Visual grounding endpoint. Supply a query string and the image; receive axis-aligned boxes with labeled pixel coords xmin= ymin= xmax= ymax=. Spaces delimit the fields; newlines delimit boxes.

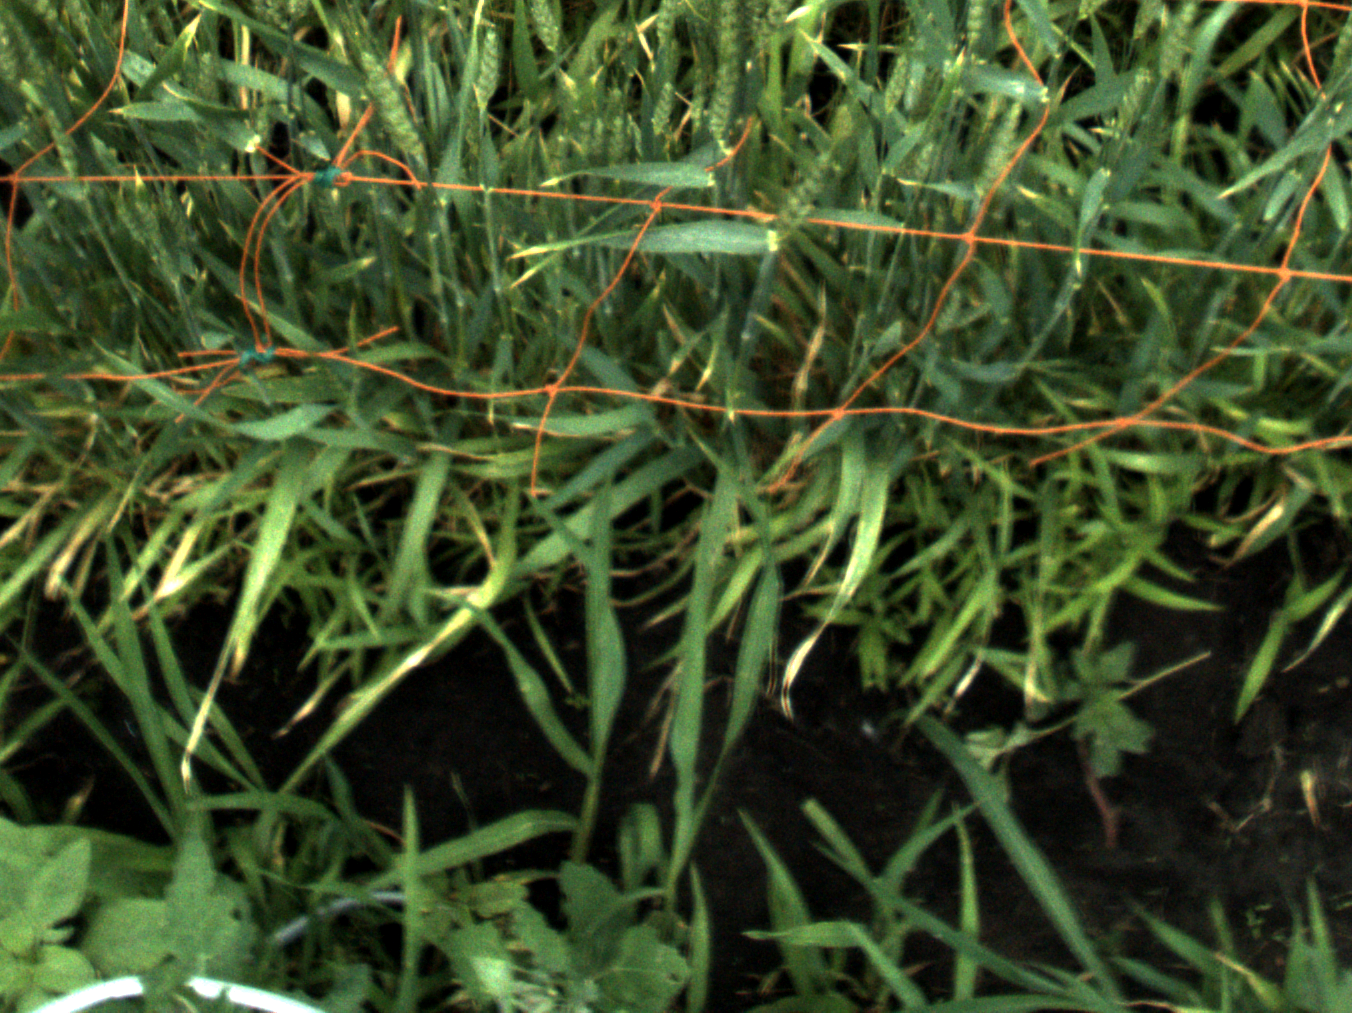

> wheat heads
xmin=775 ymin=147 xmax=833 ymax=236
xmin=752 ymin=0 xmax=814 ymax=49
xmin=48 ymin=109 xmax=81 ymax=178
xmin=708 ymin=0 xmax=741 ymax=135
xmin=553 ymin=68 xmax=581 ymax=129
xmin=925 ymin=204 xmax=945 ymax=253
xmin=312 ymin=182 xmax=343 ymax=231
xmin=463 ymin=96 xmax=482 ymax=146
xmin=193 ymin=49 xmax=214 ymax=101
xmin=138 ymin=12 xmax=157 ymax=55
xmin=3 ymin=7 xmax=47 ymax=74
xmin=686 ymin=68 xmax=705 ymax=137
xmin=684 ymin=0 xmax=715 ymax=44
xmin=881 ymin=51 xmax=904 ymax=117
xmin=941 ymin=56 xmax=957 ymax=85
xmin=650 ymin=82 xmax=676 ymax=138
xmin=0 ymin=3 xmax=16 ymax=83
xmin=1130 ymin=0 xmax=1163 ymax=41
xmin=1329 ymin=0 xmax=1352 ymax=60
xmin=976 ymin=97 xmax=1022 ymax=192
xmin=252 ymin=97 xmax=270 ymax=142
xmin=255 ymin=0 xmax=291 ymax=30
xmin=607 ymin=114 xmax=629 ymax=164
xmin=528 ymin=0 xmax=561 ymax=53
xmin=931 ymin=291 xmax=961 ymax=335
xmin=474 ymin=26 xmax=498 ymax=102
xmin=966 ymin=0 xmax=1007 ymax=48
xmin=1112 ymin=66 xmax=1151 ymax=131
xmin=915 ymin=138 xmax=936 ymax=180
xmin=152 ymin=4 xmax=175 ymax=43
xmin=48 ymin=0 xmax=87 ymax=27
xmin=739 ymin=0 xmax=769 ymax=40
xmin=655 ymin=0 xmax=680 ymax=38
xmin=1156 ymin=2 xmax=1198 ymax=75
xmin=832 ymin=100 xmax=855 ymax=147
xmin=285 ymin=0 xmax=315 ymax=22
xmin=358 ymin=51 xmax=426 ymax=161
xmin=590 ymin=114 xmax=604 ymax=161
xmin=113 ymin=202 xmax=146 ymax=242
xmin=135 ymin=199 xmax=162 ymax=247
xmin=156 ymin=187 xmax=194 ymax=239
xmin=245 ymin=0 xmax=271 ymax=26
